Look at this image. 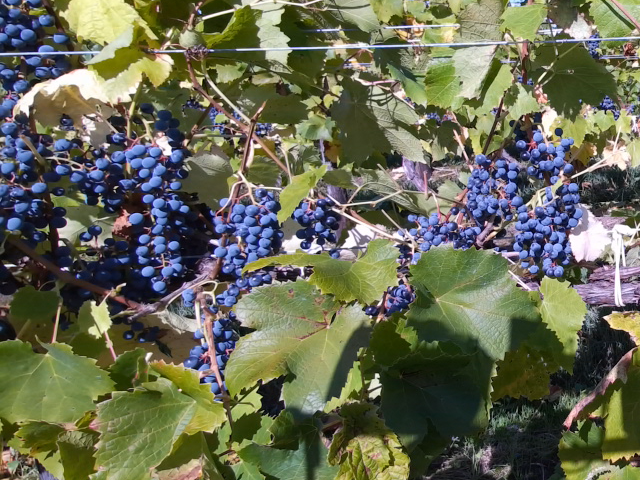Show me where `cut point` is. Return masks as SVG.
Segmentation results:
<instances>
[{
	"label": "cut point",
	"instance_id": "6a23745f",
	"mask_svg": "<svg viewBox=\"0 0 640 480\" xmlns=\"http://www.w3.org/2000/svg\"><path fill=\"white\" fill-rule=\"evenodd\" d=\"M241 179L244 181V183L246 184V186H247V188H248L249 190H252V189H253V185H252V183L250 182V180L248 179V177H247L244 173H242V175H241Z\"/></svg>",
	"mask_w": 640,
	"mask_h": 480
}]
</instances>
